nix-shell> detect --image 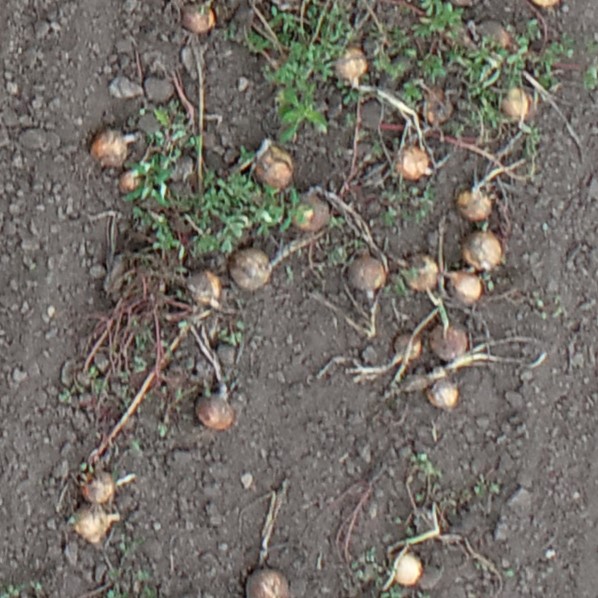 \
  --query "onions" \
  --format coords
[428,379,459,407]
[394,331,421,358]
[404,256,438,291]
[73,508,110,542]
[500,86,534,120]
[294,201,321,229]
[346,255,385,291]
[334,47,367,81]
[193,393,233,430]
[82,472,112,502]
[244,567,290,598]
[117,169,142,195]
[186,270,221,306]
[252,142,294,187]
[418,87,453,124]
[478,18,509,49]
[446,269,481,303]
[527,0,564,10]
[178,3,213,35]
[456,185,492,221]
[227,249,269,291]
[90,129,126,168]
[460,230,502,268]
[391,552,423,584]
[430,323,468,362]
[395,146,431,180]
